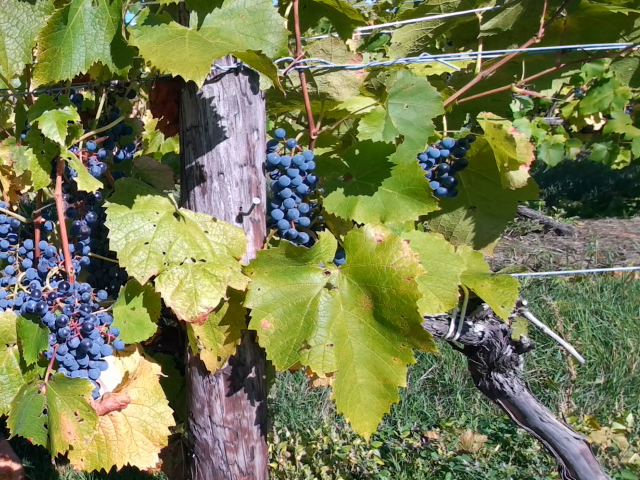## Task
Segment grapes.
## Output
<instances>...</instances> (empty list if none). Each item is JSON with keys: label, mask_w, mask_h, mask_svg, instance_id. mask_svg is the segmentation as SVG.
I'll use <instances>...</instances> for the list:
<instances>
[{"label": "grapes", "mask_w": 640, "mask_h": 480, "mask_svg": "<svg viewBox=\"0 0 640 480\" xmlns=\"http://www.w3.org/2000/svg\"><path fill=\"white\" fill-rule=\"evenodd\" d=\"M134 145L132 143L127 144L123 149H119L113 156V162L119 163L124 159H130L134 156Z\"/></svg>", "instance_id": "6"}, {"label": "grapes", "mask_w": 640, "mask_h": 480, "mask_svg": "<svg viewBox=\"0 0 640 480\" xmlns=\"http://www.w3.org/2000/svg\"><path fill=\"white\" fill-rule=\"evenodd\" d=\"M476 142V136L474 134H468L465 138L459 139L457 142L452 138H445L442 141H438L436 146L439 149H435L434 146H430L424 150V153H419L418 161L419 165H422L423 170H427L425 177L429 180V186L432 191H435L437 197L453 198L458 195V179L455 177L457 171H462L469 166V159L463 158L466 155V150L471 148L472 143ZM453 153L455 158H461L456 160L453 165L447 163H439L440 157L447 158Z\"/></svg>", "instance_id": "3"}, {"label": "grapes", "mask_w": 640, "mask_h": 480, "mask_svg": "<svg viewBox=\"0 0 640 480\" xmlns=\"http://www.w3.org/2000/svg\"><path fill=\"white\" fill-rule=\"evenodd\" d=\"M97 221L98 215L93 210H88L85 218L72 221L70 234L77 236V249L81 250L83 255L80 259L73 257L76 244L70 242L75 283H69L64 279H59L57 276L52 277L49 286L51 288L57 287L58 291L50 293L45 300L43 299V293L40 291L45 275L49 268H55L59 261L64 260L63 253L59 257L56 256L57 247L54 244H50L48 240L41 239L38 243V248L44 253L39 258L38 266L33 268L35 241L33 239H25L18 250V254L28 257L21 261V266L26 269V278L21 281V284L23 286L29 285L28 291L30 293L28 294L26 290H20L16 299H6L10 290L3 287L17 282L15 276L10 277L16 272V267L12 264L17 261V258L11 256L9 252H0V259H5L11 263L4 268L6 275L0 278V311H4L8 307L13 308L16 305L20 307L19 310H14L16 315L37 312L43 323L53 330L49 335V344L55 346L58 342H61L57 347L56 355L55 349L50 347L43 351L44 357L52 359L55 355V359L59 361L58 370L64 372L66 377H84L87 378V381L92 382L96 387L91 391L94 400L100 397L101 385L97 379L100 378L101 372H105L108 369V362L100 358L111 356L114 353V349L120 352L126 349V343L122 339H114L112 345L105 343V339L96 328L98 325L103 326L105 323L110 325L113 322V315L106 311L93 314V308L98 309L100 304L91 300L92 285L89 282H84L83 284L77 282V275H80L81 267L87 268L90 265L88 254L92 250L93 241L90 238L91 226L89 224H95ZM63 297H65V305L62 308L63 314L56 317L51 313L49 307L53 305L52 301ZM77 310L81 315L78 318V322L83 324L79 327V330L88 335L83 339L75 337L76 331L68 327L69 317Z\"/></svg>", "instance_id": "1"}, {"label": "grapes", "mask_w": 640, "mask_h": 480, "mask_svg": "<svg viewBox=\"0 0 640 480\" xmlns=\"http://www.w3.org/2000/svg\"><path fill=\"white\" fill-rule=\"evenodd\" d=\"M109 156V150L107 148H100L98 150V159L105 160ZM94 157H90L87 159V163L89 165L88 173L94 175L95 178H98L102 174H104L107 170V162L99 161Z\"/></svg>", "instance_id": "5"}, {"label": "grapes", "mask_w": 640, "mask_h": 480, "mask_svg": "<svg viewBox=\"0 0 640 480\" xmlns=\"http://www.w3.org/2000/svg\"><path fill=\"white\" fill-rule=\"evenodd\" d=\"M278 148L276 140L266 143L265 167L269 171L272 191L276 199L271 201L270 217L278 221L277 227L281 229V237L291 239L294 245L308 244L311 235L306 231L291 228L290 221L300 227H308L310 218L301 214H308L317 207L314 202L301 203L303 195H309L316 187L319 176L314 171L317 163L313 161L315 154L311 150H305L301 155H280L274 153Z\"/></svg>", "instance_id": "2"}, {"label": "grapes", "mask_w": 640, "mask_h": 480, "mask_svg": "<svg viewBox=\"0 0 640 480\" xmlns=\"http://www.w3.org/2000/svg\"><path fill=\"white\" fill-rule=\"evenodd\" d=\"M21 227V221L8 214H0V251L13 252L19 241V235L15 229Z\"/></svg>", "instance_id": "4"}]
</instances>
